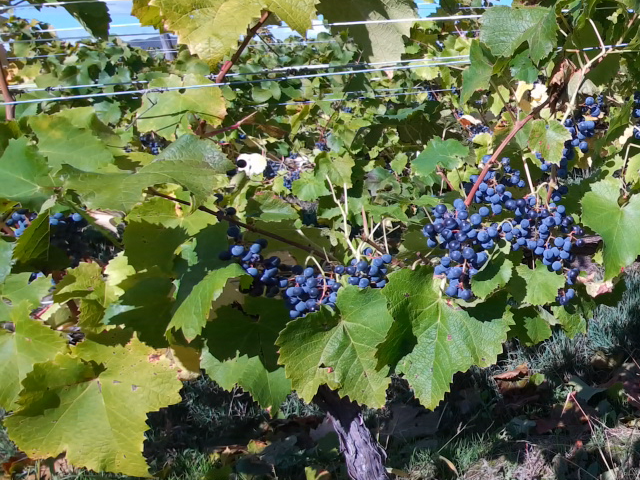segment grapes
<instances>
[{
    "label": "grapes",
    "mask_w": 640,
    "mask_h": 480,
    "mask_svg": "<svg viewBox=\"0 0 640 480\" xmlns=\"http://www.w3.org/2000/svg\"><path fill=\"white\" fill-rule=\"evenodd\" d=\"M535 156H536L537 160H538V161L540 162V164H541V170H542V171H548V170H551V168H552V164H551V163H549V162H547L546 160H544V159H543V157L541 156V153H540V152H536V153H535Z\"/></svg>",
    "instance_id": "2adb6a1f"
},
{
    "label": "grapes",
    "mask_w": 640,
    "mask_h": 480,
    "mask_svg": "<svg viewBox=\"0 0 640 480\" xmlns=\"http://www.w3.org/2000/svg\"><path fill=\"white\" fill-rule=\"evenodd\" d=\"M268 247V240L258 238L249 246V250L240 244H231L229 250L221 251L218 259L222 261H230L233 257H240L242 261L240 266L246 270V273L253 277V284L249 289H241L238 285L240 294H249L250 297H259L263 294L266 286L265 297L273 298L279 293L280 288H286L289 284L287 277H281L278 271L292 272L294 282L299 286H291L282 291V298L286 299V305L290 309L288 316L291 319L297 317L304 318L306 314H313L320 311V301L322 305H329L331 309L335 308L337 292L342 287L341 282H337L334 278H322L321 273H315L313 265H307L303 268L300 265H290L289 263H281V258L272 255L265 259L260 253ZM266 268L263 274L250 264L263 263Z\"/></svg>",
    "instance_id": "b958b902"
},
{
    "label": "grapes",
    "mask_w": 640,
    "mask_h": 480,
    "mask_svg": "<svg viewBox=\"0 0 640 480\" xmlns=\"http://www.w3.org/2000/svg\"><path fill=\"white\" fill-rule=\"evenodd\" d=\"M574 294H575V289L574 288H568L566 290V293L561 295V294H557L556 295V302L559 303L562 306H567L568 303L570 302V300L574 299Z\"/></svg>",
    "instance_id": "5460f4e3"
},
{
    "label": "grapes",
    "mask_w": 640,
    "mask_h": 480,
    "mask_svg": "<svg viewBox=\"0 0 640 480\" xmlns=\"http://www.w3.org/2000/svg\"><path fill=\"white\" fill-rule=\"evenodd\" d=\"M585 105L582 110L577 113L574 117V122L577 123V130L573 125V119L567 118L563 122V126L566 127L571 132L570 141L565 143V148L563 149V158L559 161L560 167L556 170V174L558 177H565L568 174L567 164L569 160L574 158V148H579L581 153H587L589 149V144L585 141V138H592L595 133V128L597 127V122L592 120H587L583 117L587 111H590V116L592 118H596L600 114V108L603 105V95L599 94L597 102H595L593 97L585 98Z\"/></svg>",
    "instance_id": "0513c4c2"
},
{
    "label": "grapes",
    "mask_w": 640,
    "mask_h": 480,
    "mask_svg": "<svg viewBox=\"0 0 640 480\" xmlns=\"http://www.w3.org/2000/svg\"><path fill=\"white\" fill-rule=\"evenodd\" d=\"M478 177H479L478 174H470L469 175V178H468V182L469 183H465L464 184V188H465L464 193L465 194H469V191L471 190L473 184L475 183V181L477 180Z\"/></svg>",
    "instance_id": "ef6de9ee"
},
{
    "label": "grapes",
    "mask_w": 640,
    "mask_h": 480,
    "mask_svg": "<svg viewBox=\"0 0 640 480\" xmlns=\"http://www.w3.org/2000/svg\"><path fill=\"white\" fill-rule=\"evenodd\" d=\"M62 218H63V214L62 213L53 214L52 216L49 217V225L50 226H54V227L65 226L66 222L60 220Z\"/></svg>",
    "instance_id": "e5b3c951"
},
{
    "label": "grapes",
    "mask_w": 640,
    "mask_h": 480,
    "mask_svg": "<svg viewBox=\"0 0 640 480\" xmlns=\"http://www.w3.org/2000/svg\"><path fill=\"white\" fill-rule=\"evenodd\" d=\"M229 228L226 230V235L233 237L235 242H240L243 239V235L240 234L241 230L238 226L228 222Z\"/></svg>",
    "instance_id": "83cd7487"
},
{
    "label": "grapes",
    "mask_w": 640,
    "mask_h": 480,
    "mask_svg": "<svg viewBox=\"0 0 640 480\" xmlns=\"http://www.w3.org/2000/svg\"><path fill=\"white\" fill-rule=\"evenodd\" d=\"M501 166L504 167L506 173H511L509 178L502 177L496 170H489L484 177V181L481 182L477 191L473 196V201L480 204L484 201L485 204H492L490 208L488 206H480L478 213H473L468 219L467 205L461 198H456L453 201L454 212L448 213V207L445 204H438L433 207V224H427L421 229V234L425 237V243L429 248H436L438 241L435 237L438 235L440 247L442 249H449L448 257H443L434 268L436 275L446 274V280L448 286L445 289V294L450 297H458L461 300H468L471 297V291L458 287L460 285V278L463 276L464 267L457 265L456 267L450 266L452 260L458 264H463L465 261L469 265L465 269V275L467 277H473L478 274L487 260V253L485 251H479L476 253L474 248L463 247V241L470 239L473 245H478L483 249H492L494 247L493 239L498 237L499 224L492 222L490 226L486 228H480L482 218H488L490 211L494 215H500L502 212V204L507 211H514L515 218L509 223H503L500 226V231L504 233V239L507 242H511L514 237H517L510 244V250L512 252H519L522 246L525 245L527 250H532V254L535 256H543V265L551 266V268L560 272L563 268L561 260H566L568 263H573L575 260V254L570 250L572 249V241L570 236L556 237L554 241L555 247L550 243L546 244V240L550 236V230L556 226L560 227V233L566 234L569 232L568 225L574 223V218L567 215L566 207L562 204L556 205L555 202H559L562 195H566L569 192L567 186H559L558 190L553 189L551 200L549 204L550 211L547 209H540L539 213L533 210L532 207L536 204V198L533 195H529L527 199L524 198H512V193L506 191V188H511L514 185L517 187H525L526 183L521 178V171L519 169L512 168L511 159L509 157H503L500 160ZM499 184L495 187H489L486 182L488 180H498ZM536 218L541 219L537 225L538 237L535 240L527 238L528 228H531L536 223Z\"/></svg>",
    "instance_id": "01657485"
},
{
    "label": "grapes",
    "mask_w": 640,
    "mask_h": 480,
    "mask_svg": "<svg viewBox=\"0 0 640 480\" xmlns=\"http://www.w3.org/2000/svg\"><path fill=\"white\" fill-rule=\"evenodd\" d=\"M392 262V256L390 254L381 255L380 258H374L372 265L366 261H359L353 259L351 265L347 267L345 265H336L334 272L336 274H347L348 283L350 285H358L360 289H365L371 283L374 282L376 288H384L386 286V280L383 275L387 273V267L384 264H390Z\"/></svg>",
    "instance_id": "84f90ec7"
},
{
    "label": "grapes",
    "mask_w": 640,
    "mask_h": 480,
    "mask_svg": "<svg viewBox=\"0 0 640 480\" xmlns=\"http://www.w3.org/2000/svg\"><path fill=\"white\" fill-rule=\"evenodd\" d=\"M26 214H27L26 208L13 211L9 219L6 221L7 226H12L13 224H16L19 226V228H16L14 231L15 237H20L28 227V222L24 217Z\"/></svg>",
    "instance_id": "f8a65327"
}]
</instances>
